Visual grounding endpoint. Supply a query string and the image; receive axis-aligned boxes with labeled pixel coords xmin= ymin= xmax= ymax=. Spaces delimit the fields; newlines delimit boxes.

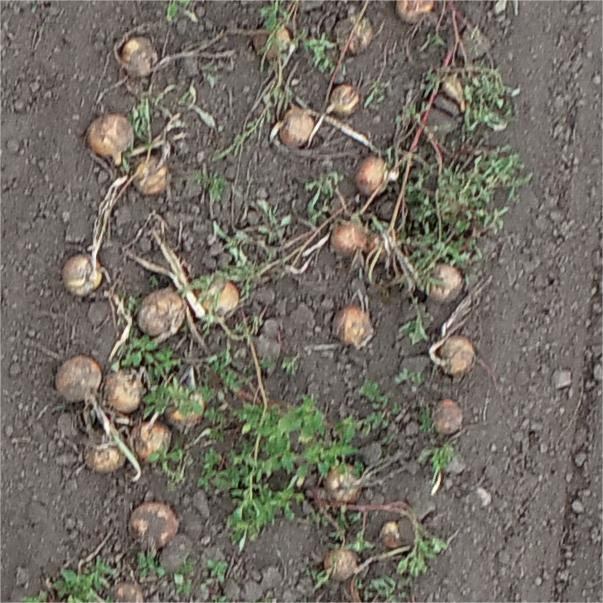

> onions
xmin=193 ymin=278 xmax=238 ymax=319
xmin=60 ymin=255 xmax=101 ymax=296
xmin=324 ymin=548 xmax=360 ymax=579
xmin=130 ymin=502 xmax=175 ymax=549
xmin=85 ymin=114 xmax=130 ymax=156
xmin=433 ymin=334 xmax=472 ymax=376
xmin=368 ymin=225 xmax=404 ymax=263
xmin=397 ymin=0 xmax=434 ymax=22
xmin=331 ymin=220 xmax=369 ymax=256
xmin=167 ymin=389 xmax=205 ymax=426
xmin=342 ymin=17 xmax=374 ymax=53
xmin=112 ymin=579 xmax=141 ymax=602
xmin=117 ymin=34 xmax=154 ymax=77
xmin=134 ymin=159 xmax=168 ymax=194
xmin=439 ymin=78 xmax=466 ymax=111
xmin=102 ymin=370 xmax=143 ymax=412
xmin=330 ymin=84 xmax=358 ymax=113
xmin=88 ymin=442 xmax=121 ymax=472
xmin=274 ymin=105 xmax=316 ymax=146
xmin=352 ymin=155 xmax=387 ymax=193
xmin=378 ymin=520 xmax=401 ymax=547
xmin=426 ymin=261 xmax=461 ymax=300
xmin=429 ymin=399 xmax=462 ymax=435
xmin=137 ymin=290 xmax=186 ymax=336
xmin=332 ymin=305 xmax=373 ymax=346
xmin=54 ymin=356 xmax=101 ymax=399
xmin=326 ymin=461 xmax=360 ymax=498
xmin=256 ymin=19 xmax=292 ymax=60
xmin=135 ymin=414 xmax=173 ymax=456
